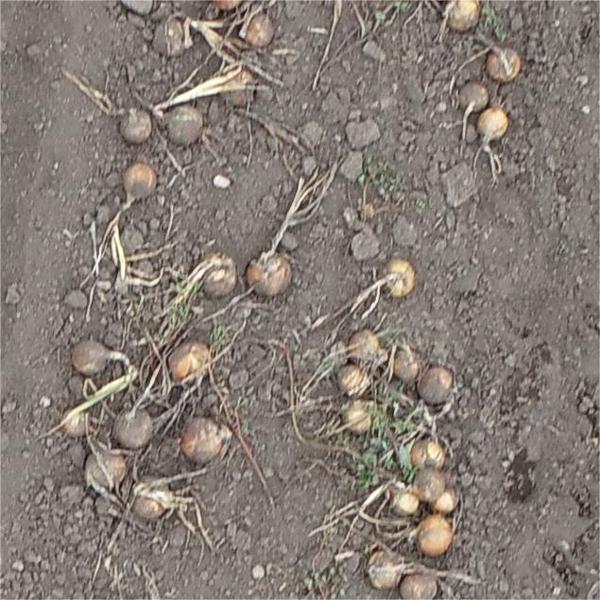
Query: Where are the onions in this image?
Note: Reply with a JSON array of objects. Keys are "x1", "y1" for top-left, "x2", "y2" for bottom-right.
[
  {"x1": 346, "y1": 325, "x2": 381, "y2": 365},
  {"x1": 485, "y1": 46, "x2": 520, "y2": 80},
  {"x1": 113, "y1": 408, "x2": 153, "y2": 447},
  {"x1": 455, "y1": 80, "x2": 486, "y2": 109},
  {"x1": 397, "y1": 571, "x2": 438, "y2": 598},
  {"x1": 59, "y1": 405, "x2": 89, "y2": 436},
  {"x1": 335, "y1": 362, "x2": 372, "y2": 394},
  {"x1": 119, "y1": 107, "x2": 150, "y2": 143},
  {"x1": 390, "y1": 343, "x2": 420, "y2": 379},
  {"x1": 162, "y1": 103, "x2": 201, "y2": 144},
  {"x1": 390, "y1": 489, "x2": 419, "y2": 515},
  {"x1": 168, "y1": 342, "x2": 208, "y2": 379},
  {"x1": 213, "y1": 0, "x2": 242, "y2": 11},
  {"x1": 472, "y1": 105, "x2": 508, "y2": 138},
  {"x1": 245, "y1": 251, "x2": 289, "y2": 294},
  {"x1": 342, "y1": 400, "x2": 372, "y2": 430},
  {"x1": 132, "y1": 484, "x2": 171, "y2": 524},
  {"x1": 161, "y1": 18, "x2": 188, "y2": 54},
  {"x1": 413, "y1": 465, "x2": 448, "y2": 503},
  {"x1": 412, "y1": 436, "x2": 446, "y2": 467},
  {"x1": 243, "y1": 15, "x2": 273, "y2": 45},
  {"x1": 367, "y1": 549, "x2": 403, "y2": 587},
  {"x1": 414, "y1": 516, "x2": 451, "y2": 555},
  {"x1": 415, "y1": 366, "x2": 452, "y2": 404},
  {"x1": 380, "y1": 257, "x2": 416, "y2": 297},
  {"x1": 435, "y1": 488, "x2": 461, "y2": 513},
  {"x1": 86, "y1": 448, "x2": 128, "y2": 492},
  {"x1": 73, "y1": 339, "x2": 107, "y2": 374},
  {"x1": 445, "y1": 1, "x2": 480, "y2": 31},
  {"x1": 120, "y1": 163, "x2": 159, "y2": 197},
  {"x1": 181, "y1": 416, "x2": 228, "y2": 462},
  {"x1": 218, "y1": 69, "x2": 257, "y2": 106},
  {"x1": 200, "y1": 261, "x2": 233, "y2": 297}
]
